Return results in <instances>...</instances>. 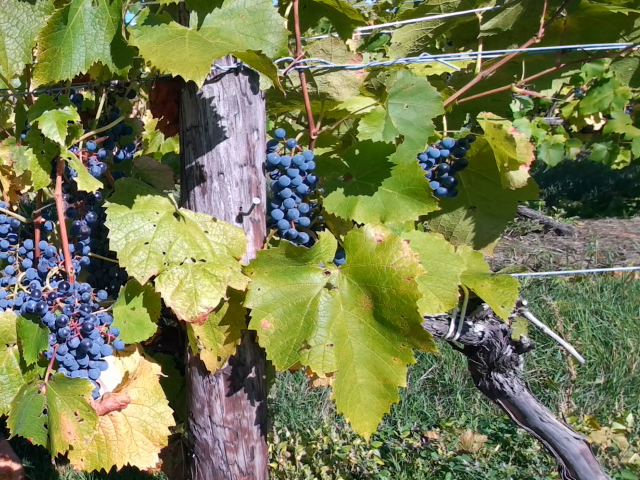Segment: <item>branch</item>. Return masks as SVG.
<instances>
[{"mask_svg":"<svg viewBox=\"0 0 640 480\" xmlns=\"http://www.w3.org/2000/svg\"><path fill=\"white\" fill-rule=\"evenodd\" d=\"M65 169V163L60 161L58 166L56 167L55 172V199L57 204L58 211V228L60 229V234L63 243V257L65 260V275L66 279L69 283H73L75 281L74 277V269L72 266V258L70 254V241L68 236V230L65 225V209L64 202L62 196V175Z\"/></svg>","mask_w":640,"mask_h":480,"instance_id":"30e6481e","label":"branch"},{"mask_svg":"<svg viewBox=\"0 0 640 480\" xmlns=\"http://www.w3.org/2000/svg\"><path fill=\"white\" fill-rule=\"evenodd\" d=\"M565 66H566L565 62L552 65L550 67H547V68L541 69V70H539L537 72H534L531 75H529L526 78L521 79L519 81L512 82V83H507V84H504L502 86H498V87L491 88V89H486V90H484V91H482L480 93H477V94H471V95H467L466 97H462V98H460L458 100V103L459 104H463L464 102H468L469 100L483 98L488 94L498 93V92L504 91V90L509 89V88H514V87H518V86L524 85V84L529 83L531 80H533V79H535V78H537V77H539L541 75L547 74V73L552 72V71L557 70V69L564 68Z\"/></svg>","mask_w":640,"mask_h":480,"instance_id":"325d2c04","label":"branch"},{"mask_svg":"<svg viewBox=\"0 0 640 480\" xmlns=\"http://www.w3.org/2000/svg\"><path fill=\"white\" fill-rule=\"evenodd\" d=\"M305 68L304 69H300L298 71V79H299V83H300V87L302 89L303 92V102H304V108H305V112L307 115V119L309 122V127H310V135L308 138V148L310 150H313L315 148V141L317 138V125H316V119L312 110V106H311V100H310V89L307 85V81H306V77H305Z\"/></svg>","mask_w":640,"mask_h":480,"instance_id":"170604dd","label":"branch"},{"mask_svg":"<svg viewBox=\"0 0 640 480\" xmlns=\"http://www.w3.org/2000/svg\"><path fill=\"white\" fill-rule=\"evenodd\" d=\"M516 54H517V53H515V52H510V53H509L505 58H503V59H501V60H499V61H497V62H495V63H492V64H491V65H489V66H486V67H485V68H484V69H483V70L478 74V76H477V77H475L474 79H472V80H470L468 83H466V84H465V85H464V86H463V87H462L458 92H456V93H454V94H452V95H448V96L446 97V99L442 102V105H443V106H446V105H447L451 100L457 99V98H459L460 96H462V95L466 92V90H467V89H469L471 86H473L474 84H476L477 82H479V81H480V80L485 76V74H486L487 72H489V71L493 70L494 68H497V67H499V66H501V65H503V64H505V63H507V62H509V61L513 58V56H515Z\"/></svg>","mask_w":640,"mask_h":480,"instance_id":"45aa463d","label":"branch"},{"mask_svg":"<svg viewBox=\"0 0 640 480\" xmlns=\"http://www.w3.org/2000/svg\"><path fill=\"white\" fill-rule=\"evenodd\" d=\"M300 0H293L292 15L294 18V38L297 57L299 59L304 58V50L301 40V16L299 13Z\"/></svg>","mask_w":640,"mask_h":480,"instance_id":"982ccf7c","label":"branch"},{"mask_svg":"<svg viewBox=\"0 0 640 480\" xmlns=\"http://www.w3.org/2000/svg\"><path fill=\"white\" fill-rule=\"evenodd\" d=\"M37 209H36V218H35V255H34V261H33V266L37 267L39 264V258L41 256V250L38 248V243L40 242V238H41V228H40V220H41V198H42V191L38 190L37 191Z\"/></svg>","mask_w":640,"mask_h":480,"instance_id":"1ff4a987","label":"branch"},{"mask_svg":"<svg viewBox=\"0 0 640 480\" xmlns=\"http://www.w3.org/2000/svg\"><path fill=\"white\" fill-rule=\"evenodd\" d=\"M565 8L566 4L562 3L561 6L551 15L546 24L533 37L527 39L526 42L522 44V47H528L530 44L538 40L549 29L556 17L563 12Z\"/></svg>","mask_w":640,"mask_h":480,"instance_id":"ea751061","label":"branch"}]
</instances>
